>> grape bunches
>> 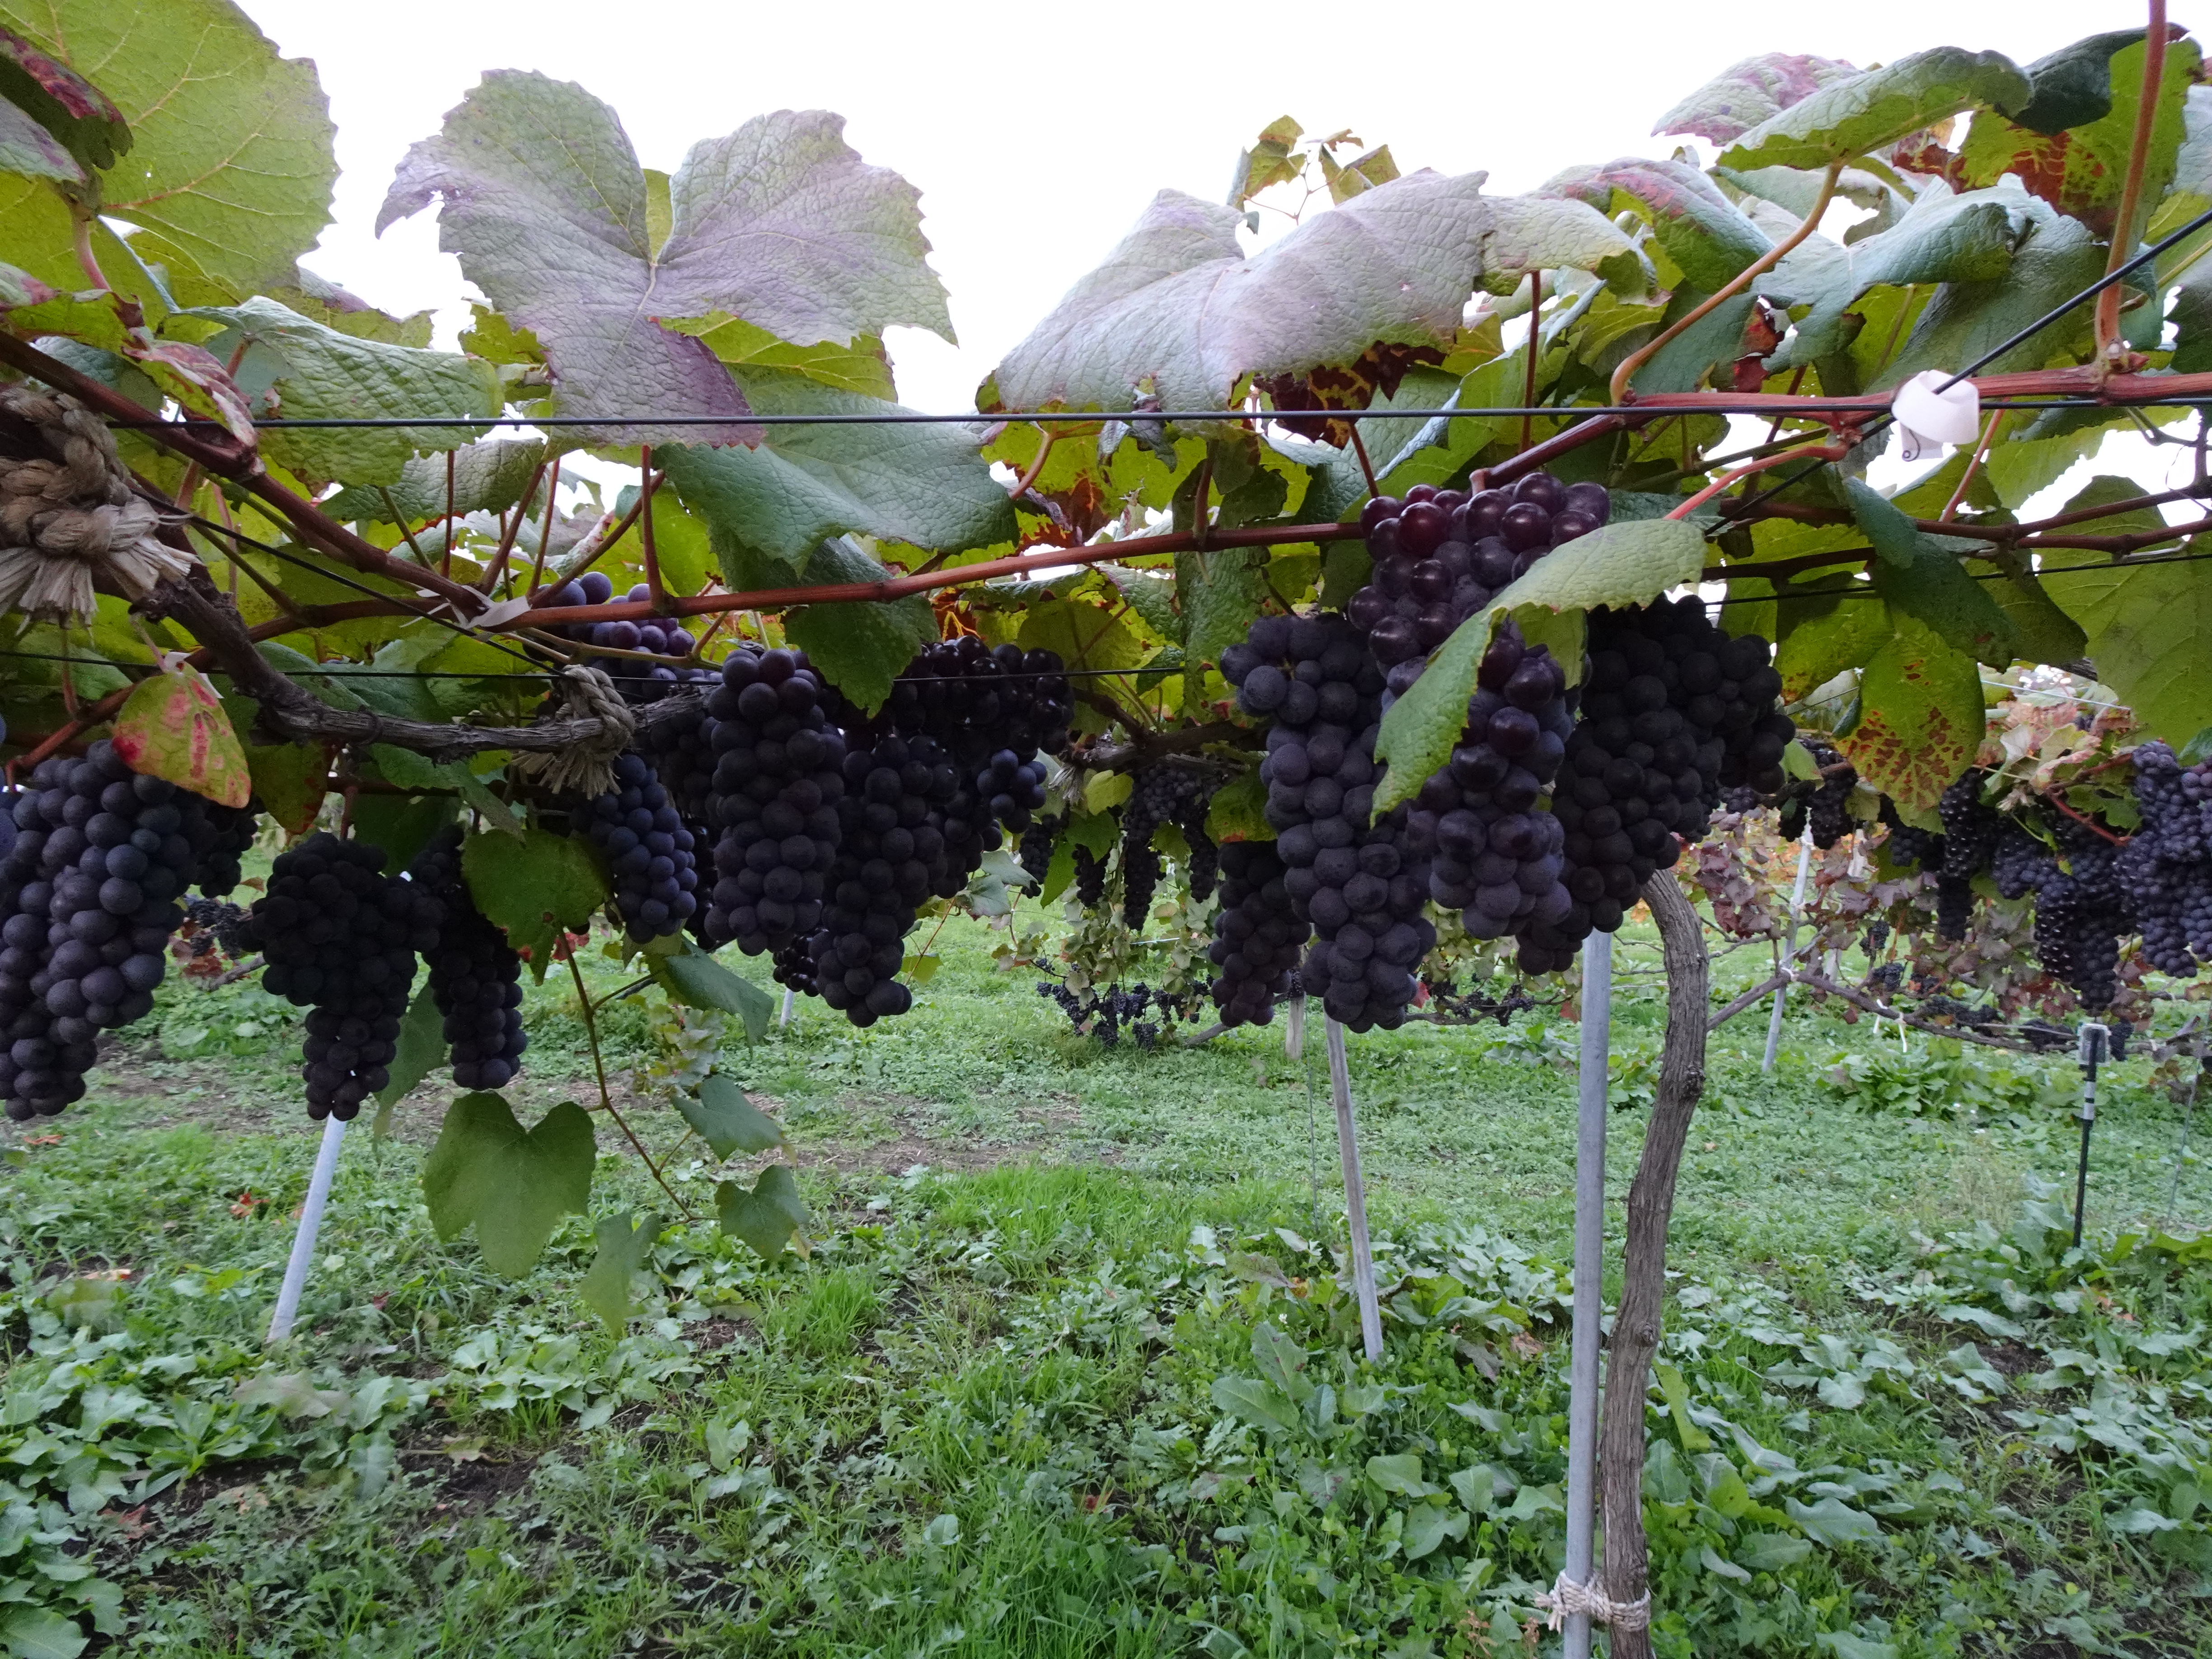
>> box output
[976,744,1056,871]
[2077,914,2123,1018]
[762,923,832,1002]
[1055,985,1102,1029]
[192,896,218,960]
[1129,979,1155,1026]
[214,904,244,959]
[1177,821,1220,908]
[1702,629,1792,807]
[2033,860,2080,982]
[1933,770,2004,877]
[1075,835,1112,927]
[13,738,183,1046]
[1134,754,1203,831]
[0,793,99,1134]
[2109,831,2179,904]
[1349,469,1614,650]
[1774,779,1814,847]
[1422,637,1585,939]
[893,631,1091,753]
[1219,614,1429,1033]
[1999,813,2050,902]
[1905,988,1960,1025]
[2016,1015,2078,1059]
[1023,801,1071,907]
[2164,755,2210,862]
[1119,830,1167,939]
[1867,960,1906,999]
[1203,835,1313,1027]
[183,801,259,903]
[1925,858,1976,944]
[1858,914,1895,956]
[703,641,854,959]
[1133,1020,1163,1059]
[2059,816,2142,911]
[818,731,984,1028]
[258,826,387,1014]
[1540,595,1727,943]
[2128,735,2176,829]
[227,1458,256,1497]
[1807,737,1862,853]
[519,573,703,702]
[580,753,699,949]
[1101,984,1129,1057]
[1450,987,1494,1021]
[419,823,532,1094]
[1889,803,1922,871]
[2069,702,2107,736]
[2179,872,2212,959]
[1961,1005,2003,1043]
[301,869,420,1120]
[1511,907,1599,984]
[2127,906,2205,983]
